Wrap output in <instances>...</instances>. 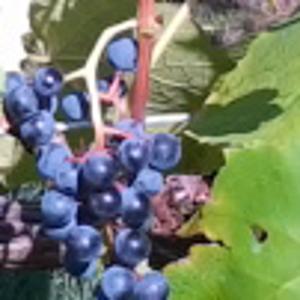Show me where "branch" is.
I'll use <instances>...</instances> for the list:
<instances>
[{"label":"branch","mask_w":300,"mask_h":300,"mask_svg":"<svg viewBox=\"0 0 300 300\" xmlns=\"http://www.w3.org/2000/svg\"><path fill=\"white\" fill-rule=\"evenodd\" d=\"M156 3L153 0H136L137 20L136 47L140 53V64L134 76L131 117L138 122L146 119L148 98L151 92V40L157 22Z\"/></svg>","instance_id":"1"}]
</instances>
